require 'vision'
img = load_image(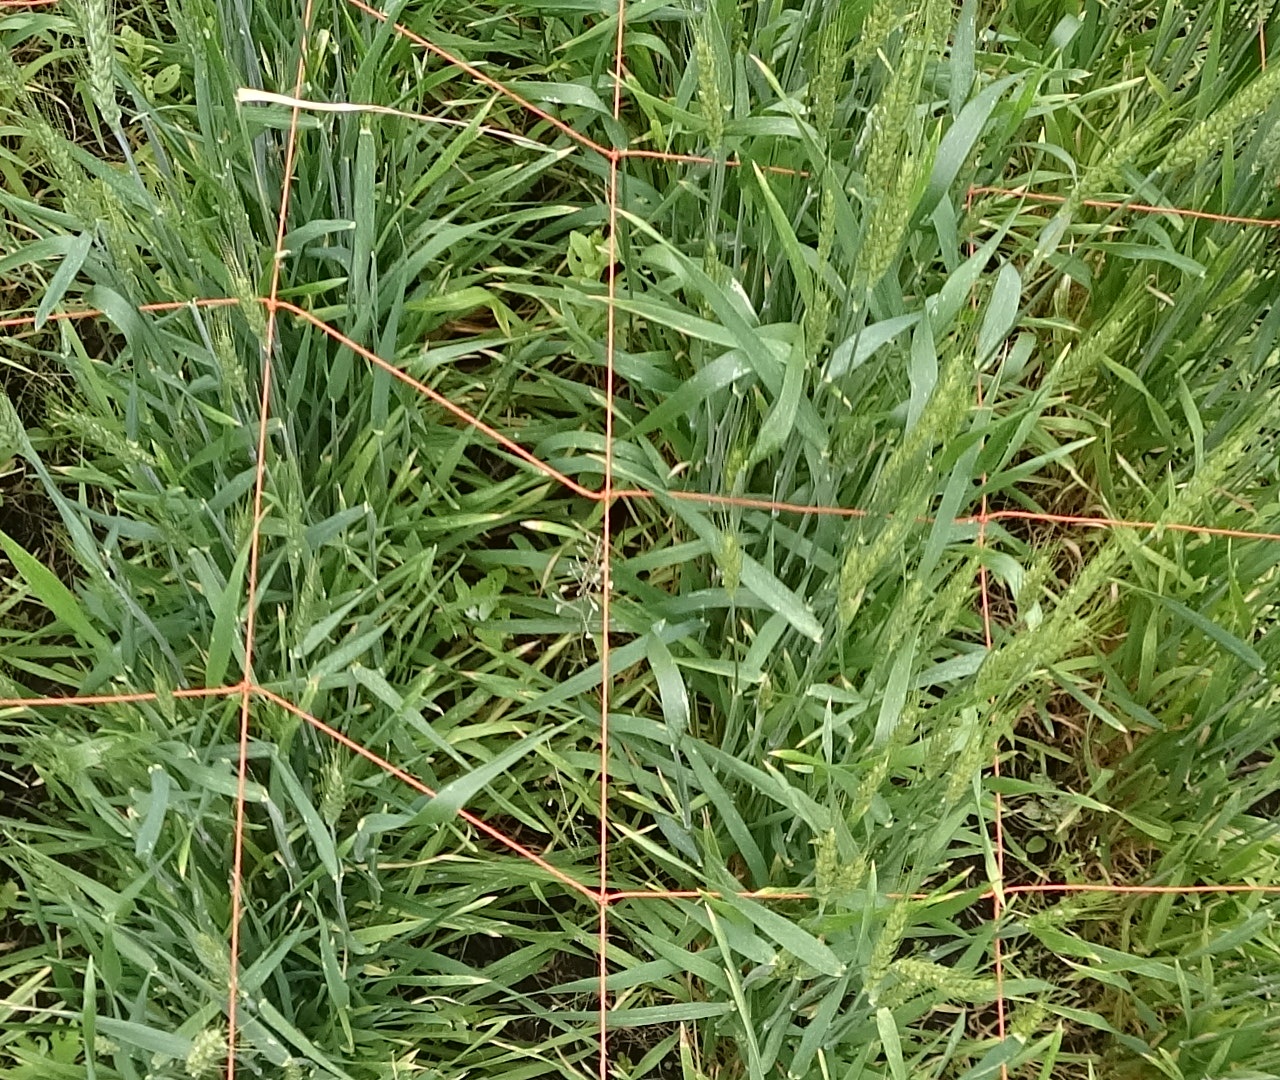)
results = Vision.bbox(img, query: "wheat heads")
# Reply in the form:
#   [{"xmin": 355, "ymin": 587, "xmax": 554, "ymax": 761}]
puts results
[
  {"xmin": 178, "ymin": 0, "xmax": 206, "ymax": 49},
  {"xmin": 237, "ymin": 278, "xmax": 273, "ymax": 343},
  {"xmin": 839, "ymin": 852, "xmax": 870, "ymax": 908},
  {"xmin": 972, "ymin": 620, "xmax": 1087, "ymax": 692},
  {"xmin": 1011, "ymin": 549, "xmax": 1049, "ymax": 618},
  {"xmin": 44, "ymin": 410, "xmax": 154, "ymax": 465},
  {"xmin": 31, "ymin": 865, "xmax": 74, "ymax": 900},
  {"xmin": 318, "ymin": 768, "xmax": 349, "ymax": 827},
  {"xmin": 82, "ymin": 0, "xmax": 119, "ymax": 132},
  {"xmin": 931, "ymin": 0, "xmax": 953, "ymax": 55},
  {"xmin": 870, "ymin": 896, "xmax": 906, "ymax": 981},
  {"xmin": 883, "ymin": 578, "xmax": 924, "ymax": 652},
  {"xmin": 954, "ymin": 198, "xmax": 991, "ymax": 236},
  {"xmin": 887, "ymin": 696, "xmax": 928, "ymax": 746},
  {"xmin": 1061, "ymin": 538, "xmax": 1115, "ymax": 617},
  {"xmin": 864, "ymin": 51, "xmax": 913, "ymax": 181},
  {"xmin": 892, "ymin": 353, "xmax": 963, "ymax": 484},
  {"xmin": 1169, "ymin": 62, "xmax": 1276, "ymax": 178},
  {"xmin": 109, "ymin": 224, "xmax": 137, "ymax": 280},
  {"xmin": 1048, "ymin": 317, "xmax": 1127, "ymax": 380},
  {"xmin": 181, "ymin": 1031, "xmax": 223, "ymax": 1075},
  {"xmin": 212, "ymin": 332, "xmax": 249, "ymax": 397},
  {"xmin": 38, "ymin": 125, "xmax": 94, "ymax": 219},
  {"xmin": 817, "ymin": 26, "xmax": 843, "ymax": 132},
  {"xmin": 279, "ymin": 490, "xmax": 308, "ymax": 569},
  {"xmin": 294, "ymin": 560, "xmax": 319, "ymax": 647},
  {"xmin": 226, "ymin": 181, "xmax": 258, "ymax": 252},
  {"xmin": 950, "ymin": 725, "xmax": 988, "ymax": 799},
  {"xmin": 683, "ymin": 34, "xmax": 723, "ymax": 139},
  {"xmin": 820, "ymin": 180, "xmax": 838, "ymax": 256},
  {"xmin": 153, "ymin": 676, "xmax": 177, "ymax": 721},
  {"xmin": 706, "ymin": 241, "xmax": 721, "ymax": 318},
  {"xmin": 179, "ymin": 200, "xmax": 205, "ymax": 256},
  {"xmin": 834, "ymin": 504, "xmax": 907, "ymax": 607},
  {"xmin": 55, "ymin": 758, "xmax": 81, "ymax": 791},
  {"xmin": 843, "ymin": 768, "xmax": 888, "ymax": 820},
  {"xmin": 927, "ymin": 974, "xmax": 996, "ymax": 998},
  {"xmin": 1023, "ymin": 994, "xmax": 1055, "ymax": 1031},
  {"xmin": 726, "ymin": 452, "xmax": 743, "ymax": 484},
  {"xmin": 811, "ymin": 834, "xmax": 842, "ymax": 908},
  {"xmin": 820, "ymin": 413, "xmax": 870, "ymax": 480},
  {"xmin": 102, "ymin": 180, "xmax": 127, "ymax": 214},
  {"xmin": 981, "ymin": 99, "xmax": 1014, "ymax": 166},
  {"xmin": 108, "ymin": 579, "xmax": 136, "ymax": 618},
  {"xmin": 233, "ymin": 502, "xmax": 256, "ymax": 553},
  {"xmin": 718, "ymin": 529, "xmax": 745, "ymax": 596},
  {"xmin": 938, "ymin": 542, "xmax": 981, "ymax": 629},
  {"xmin": 895, "ymin": 961, "xmax": 960, "ymax": 988},
  {"xmin": 878, "ymin": 154, "xmax": 917, "ymax": 273},
  {"xmin": 851, "ymin": 0, "xmax": 894, "ymax": 73},
  {"xmin": 846, "ymin": 220, "xmax": 878, "ymax": 299},
  {"xmin": 802, "ymin": 288, "xmax": 831, "ymax": 372},
  {"xmin": 1158, "ymin": 437, "xmax": 1242, "ymax": 531},
  {"xmin": 924, "ymin": 720, "xmax": 956, "ymax": 783},
  {"xmin": 198, "ymin": 930, "xmax": 227, "ymax": 973},
  {"xmin": 1072, "ymin": 126, "xmax": 1152, "ymax": 208}
]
